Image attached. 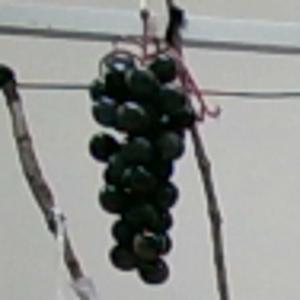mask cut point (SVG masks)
<instances>
[{
	"label": "cut point",
	"instance_id": "cut-point-1",
	"mask_svg": "<svg viewBox=\"0 0 300 300\" xmlns=\"http://www.w3.org/2000/svg\"><path fill=\"white\" fill-rule=\"evenodd\" d=\"M154 12L150 7V0H139V8L136 11L137 21L142 22V59L140 70H147L148 66V31Z\"/></svg>",
	"mask_w": 300,
	"mask_h": 300
}]
</instances>
